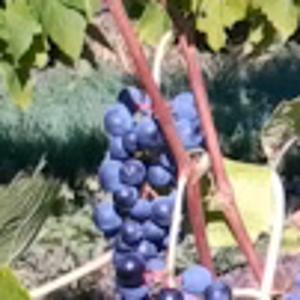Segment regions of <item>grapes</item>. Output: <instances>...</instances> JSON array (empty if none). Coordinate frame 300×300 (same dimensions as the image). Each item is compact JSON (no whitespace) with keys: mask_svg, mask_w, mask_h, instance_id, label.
Segmentation results:
<instances>
[{"mask_svg":"<svg viewBox=\"0 0 300 300\" xmlns=\"http://www.w3.org/2000/svg\"><path fill=\"white\" fill-rule=\"evenodd\" d=\"M117 104L101 117L112 140L97 170L99 188L110 194L93 211V225L114 249L109 257L116 300H186L176 287L155 294L144 276L166 265L174 198L165 191L177 182V161L167 149L155 116H139L149 106L135 87L121 89Z\"/></svg>","mask_w":300,"mask_h":300,"instance_id":"grapes-1","label":"grapes"},{"mask_svg":"<svg viewBox=\"0 0 300 300\" xmlns=\"http://www.w3.org/2000/svg\"><path fill=\"white\" fill-rule=\"evenodd\" d=\"M170 112L183 150L193 154L202 149L205 144L196 121L192 93L183 90L174 94L170 100Z\"/></svg>","mask_w":300,"mask_h":300,"instance_id":"grapes-2","label":"grapes"},{"mask_svg":"<svg viewBox=\"0 0 300 300\" xmlns=\"http://www.w3.org/2000/svg\"><path fill=\"white\" fill-rule=\"evenodd\" d=\"M180 289L189 297H204V300H233L232 287L221 280H213L201 265H190L178 275Z\"/></svg>","mask_w":300,"mask_h":300,"instance_id":"grapes-3","label":"grapes"}]
</instances>
